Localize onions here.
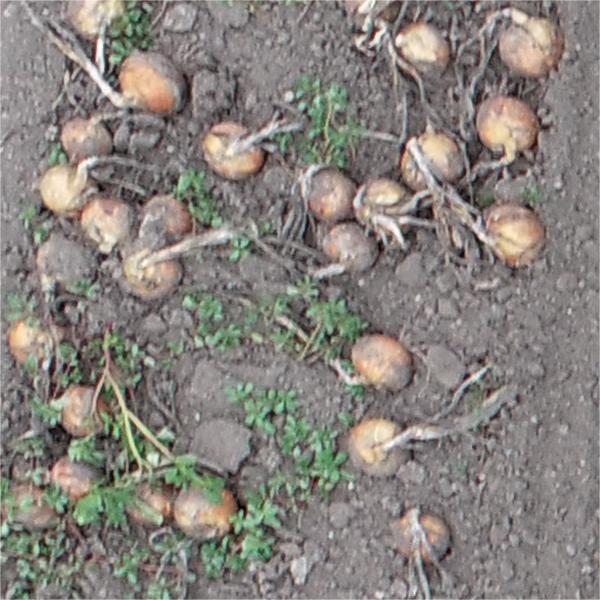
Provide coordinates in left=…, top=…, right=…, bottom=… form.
left=477, top=95, right=538, bottom=153
left=352, top=333, right=412, bottom=390
left=521, top=18, right=554, bottom=53
left=305, top=167, right=354, bottom=219
left=79, top=198, right=134, bottom=248
left=175, top=487, right=232, bottom=541
left=19, top=501, right=57, bottom=531
left=38, top=165, right=90, bottom=213
left=394, top=509, right=447, bottom=561
left=127, top=489, right=167, bottom=527
left=137, top=195, right=188, bottom=247
left=5, top=320, right=46, bottom=360
left=397, top=23, right=449, bottom=71
left=51, top=457, right=100, bottom=499
left=37, top=232, right=98, bottom=297
left=356, top=174, right=415, bottom=243
left=121, top=241, right=177, bottom=296
left=57, top=387, right=104, bottom=433
left=203, top=123, right=262, bottom=177
left=479, top=200, right=547, bottom=265
left=66, top=0, right=121, bottom=37
left=498, top=15, right=557, bottom=75
left=321, top=223, right=372, bottom=272
left=405, top=130, right=462, bottom=186
left=347, top=415, right=400, bottom=468
left=63, top=115, right=109, bottom=162
left=113, top=50, right=182, bottom=116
